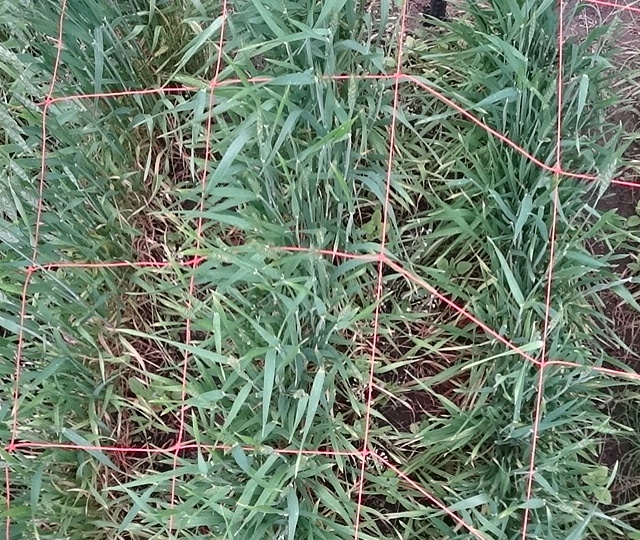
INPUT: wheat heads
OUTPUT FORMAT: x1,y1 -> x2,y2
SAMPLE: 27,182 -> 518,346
0,113 -> 21,133
63,163 -> 78,183
8,22 -> 32,47
329,11 -> 340,35
17,76 -> 39,95
257,442 -> 275,455
253,103 -> 266,140
248,174 -> 263,193
345,75 -> 356,105
4,129 -> 27,152
10,161 -> 29,183
556,500 -> 575,517
0,227 -> 21,243
23,192 -> 45,210
6,51 -> 25,74
179,71 -> 213,89
217,117 -> 231,136
213,432 -> 239,447
601,17 -> 617,40
2,198 -> 21,226
14,98 -> 44,113
6,0 -> 21,13
543,76 -> 555,105
597,157 -> 617,196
